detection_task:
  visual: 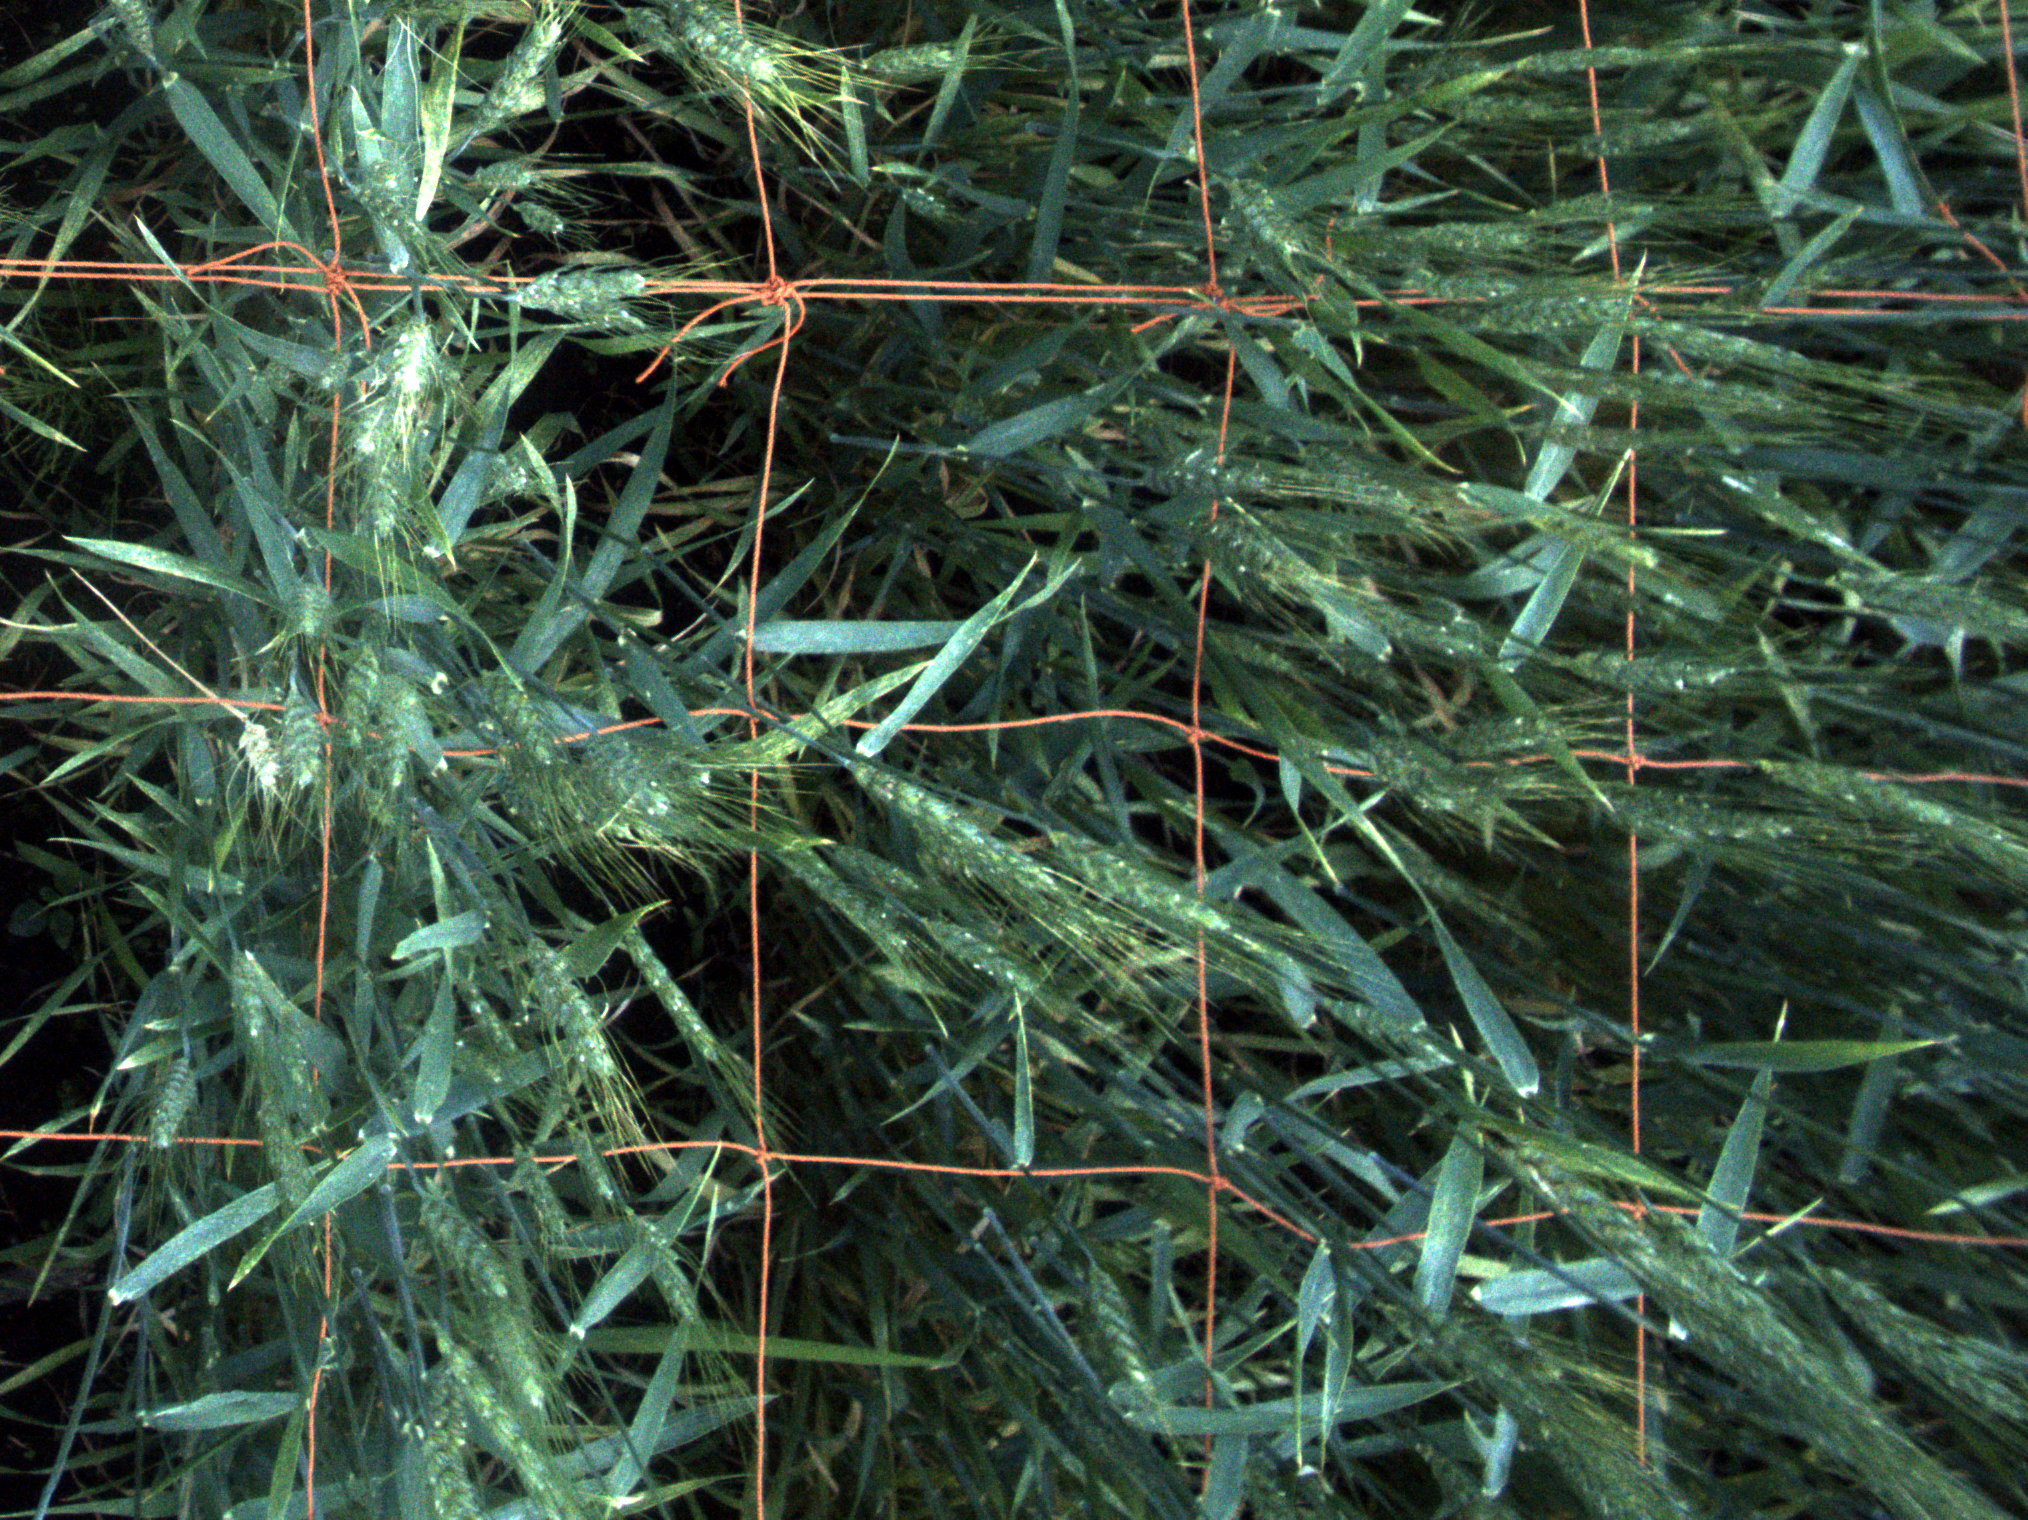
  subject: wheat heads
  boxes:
[1051,831,1232,935]
[1481,292,1629,334]
[241,716,284,799]
[147,1053,202,1146]
[226,954,268,1055]
[1565,647,1735,696]
[1367,734,1419,792]
[376,667,418,795]
[1643,1206,1804,1363]
[1398,45,1457,94]
[913,914,1045,1002]
[776,837,913,961]
[1598,780,1793,844]
[1431,93,1564,132]
[1238,1465,1302,1520]
[568,1119,619,1201]
[372,166,405,194]
[284,689,325,795]
[473,13,564,137]
[648,0,778,78]
[1089,1266,1153,1397]
[1565,577,1707,647]
[1543,510,1660,568]
[347,400,385,455]
[621,927,714,1060]
[1806,1259,2025,1422]
[1135,455,1279,499]
[1418,1445,1498,1520]
[341,634,385,759]
[862,38,955,82]
[575,729,672,823]
[1512,1140,1658,1279]
[844,760,1061,897]
[632,1215,701,1332]
[509,1141,571,1243]
[1026,1364,1114,1438]
[1510,44,1704,76]
[630,5,683,62]
[1134,406,1222,442]
[457,1051,505,1089]
[831,843,920,894]
[1455,1310,1538,1371]
[350,194,427,254]
[1680,1321,1819,1433]
[1199,522,1284,578]
[1625,312,1810,380]
[281,1033,323,1133]
[111,0,160,62]
[474,667,559,768]
[1205,627,1291,678]
[1749,758,1959,849]
[421,1192,516,1305]
[1532,192,1658,232]
[1390,214,1538,266]
[485,450,533,499]
[527,932,617,1082]
[1421,774,1478,813]
[1220,173,1307,279]
[1321,585,1487,662]
[515,199,566,239]
[368,461,407,537]
[1321,993,1421,1052]
[1420,268,1523,305]
[460,971,518,1062]
[1857,568,2023,630]
[478,155,538,188]
[900,185,950,227]
[502,261,648,311]
[1424,1310,1557,1420]
[1401,859,1467,902]
[1640,365,1786,405]
[1306,435,1401,501]
[432,1323,555,1484]
[317,349,352,391]
[501,762,549,835]
[1381,1302,1454,1371]
[297,579,330,643]
[1561,365,1669,405]
[1568,113,1693,168]
[427,1360,478,1513]
[262,1100,308,1210]
[1517,422,1704,457]
[489,1305,549,1418]
[390,313,434,406]
[584,309,644,331]
[1437,710,1552,754]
